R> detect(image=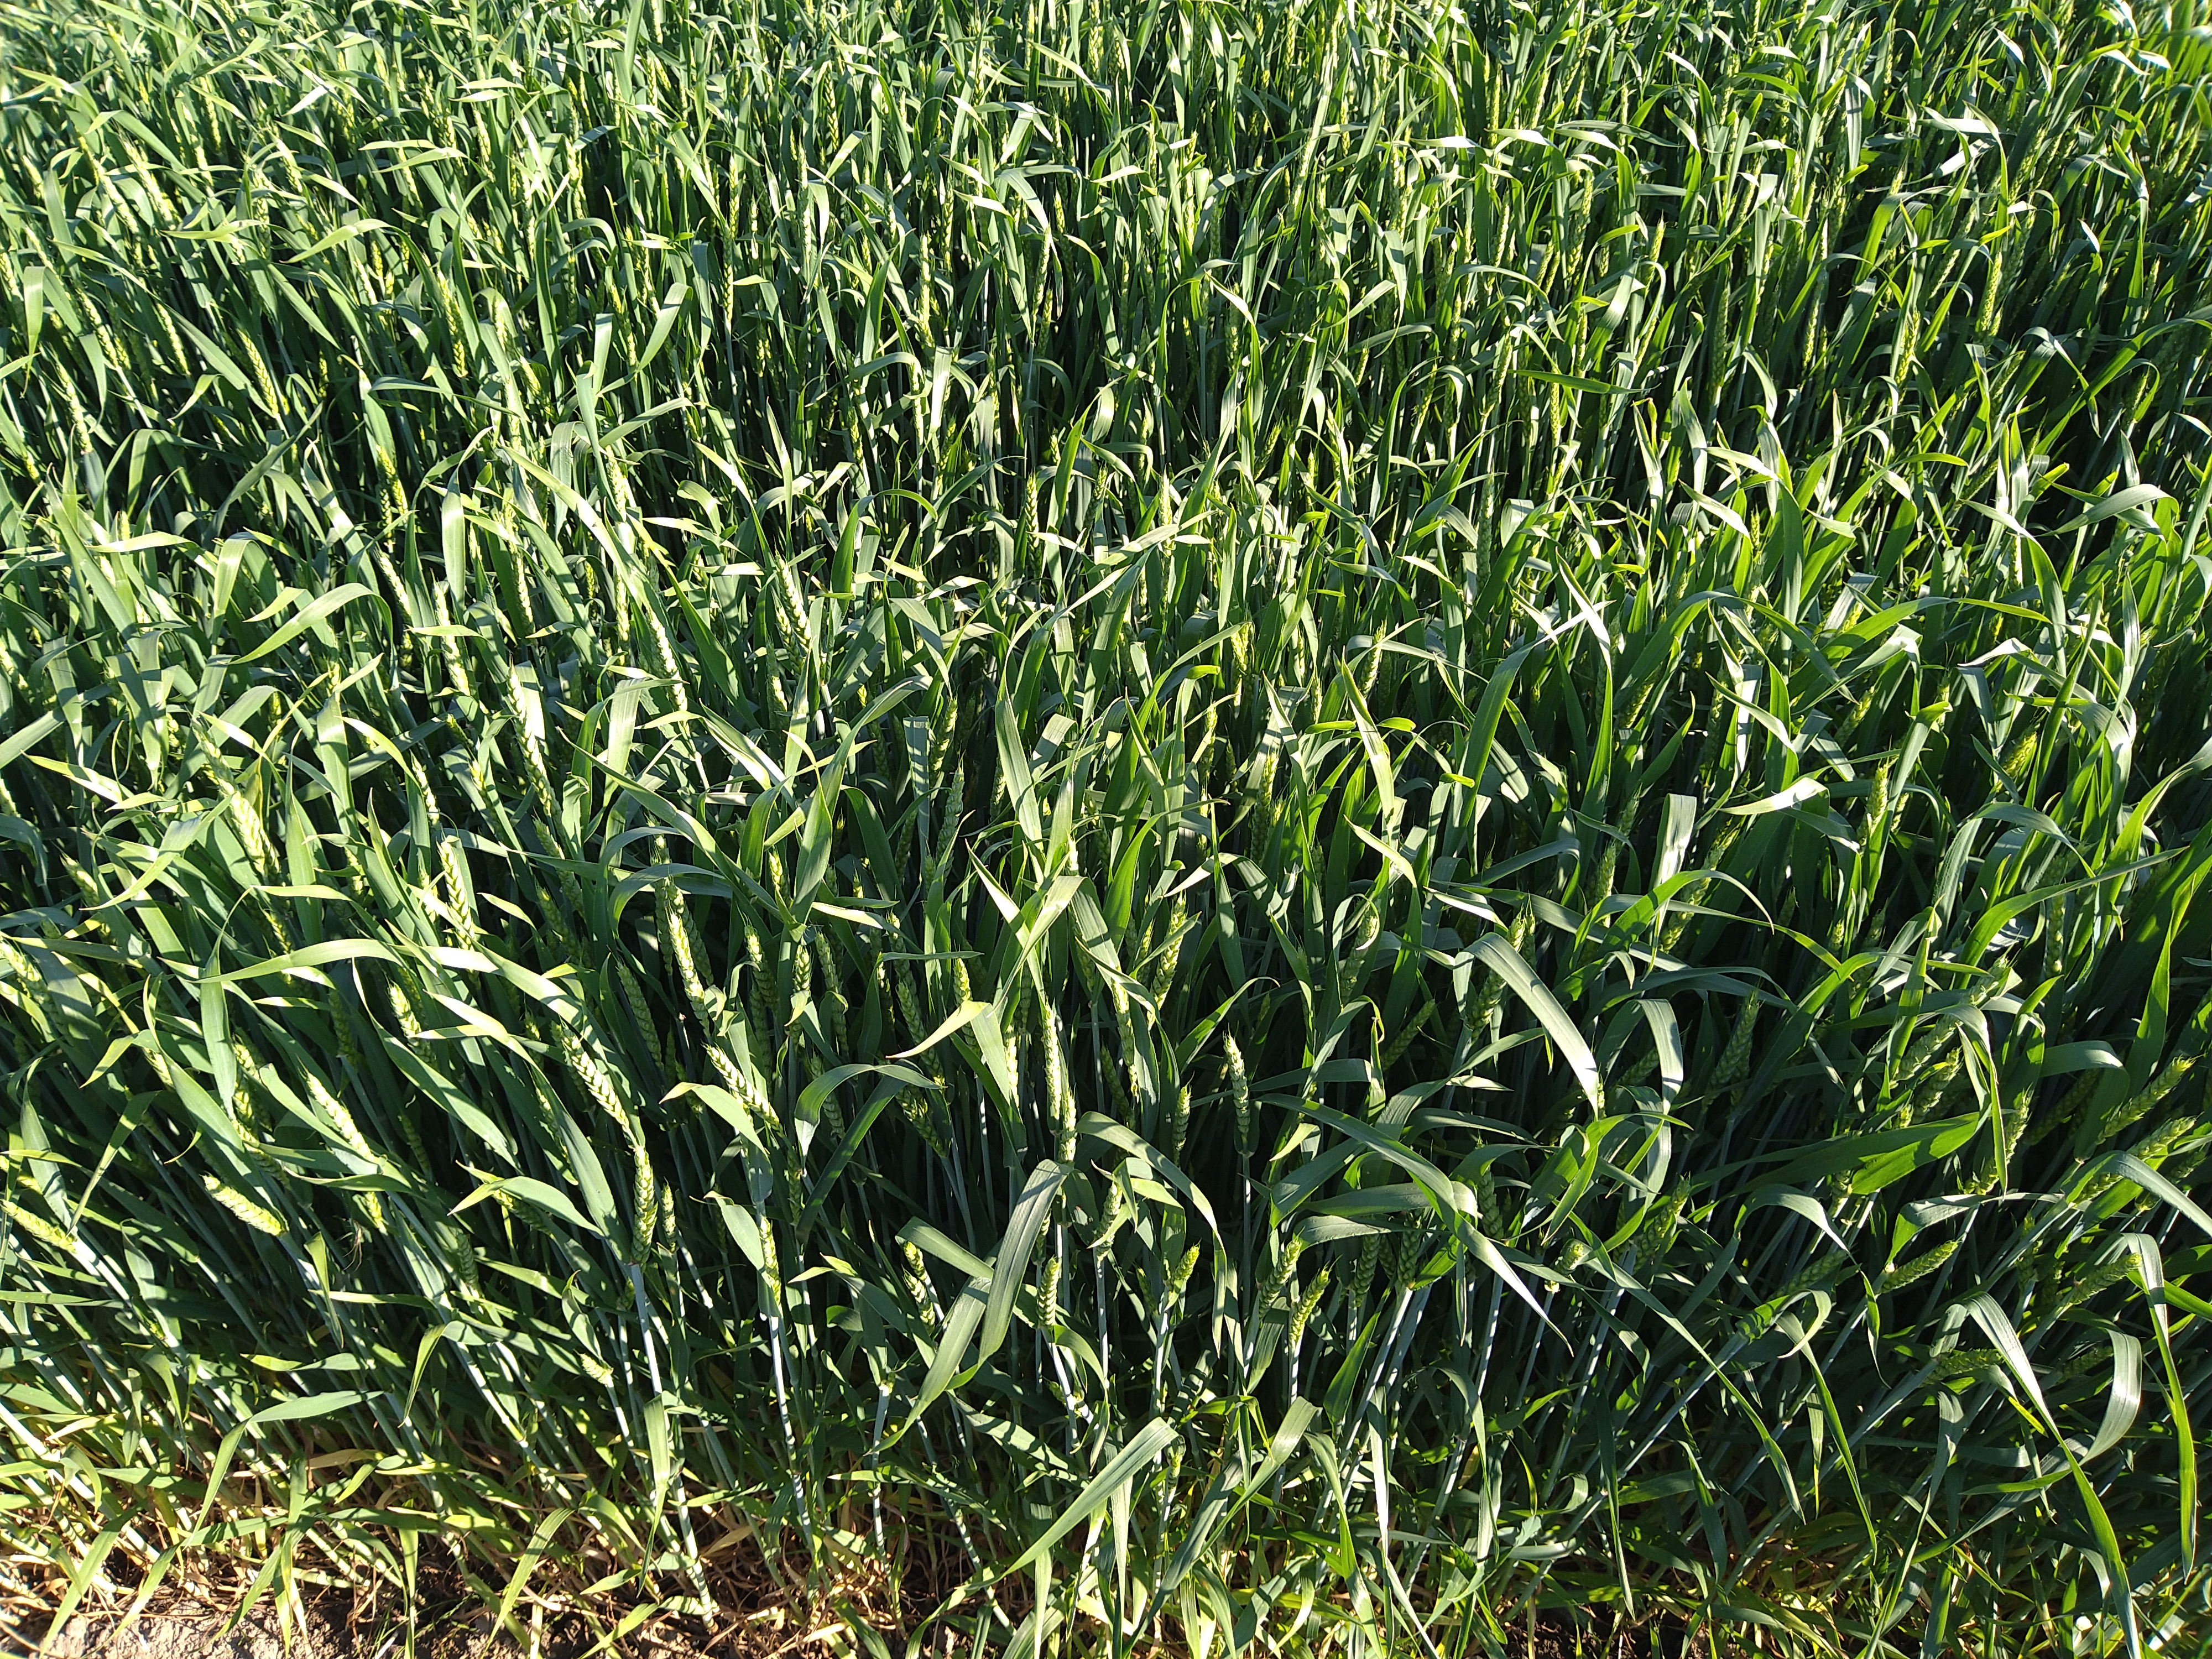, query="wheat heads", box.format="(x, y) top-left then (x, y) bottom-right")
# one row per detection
(376, 552), (414, 632)
(22, 154), (44, 194)
(1544, 251), (1562, 297)
(817, 147), (836, 211)
(654, 57), (680, 111)
(1110, 971), (1138, 1100)
(2008, 247), (2050, 323)
(918, 61), (925, 115)
(651, 616), (688, 728)
(1999, 718), (2043, 784)
(1530, 69), (1552, 131)
(1340, 900), (1377, 1009)
(40, 669), (70, 758)
(1750, 513), (1760, 549)
(958, 698), (975, 750)
(238, 887), (289, 980)
(630, 127), (639, 161)
(970, 59), (985, 123)
(221, 217), (269, 317)
(1491, 79), (1501, 147)
(851, 269), (858, 290)
(1147, 892), (1187, 1025)
(708, 599), (724, 640)
(1570, 168), (1580, 199)
(568, 158), (576, 185)
(1677, 274), (1708, 314)
(563, 1021), (632, 1122)
(1582, 864), (1603, 906)
(2049, 262), (2069, 297)
(2028, 130), (2063, 191)
(1882, 480), (1890, 501)
(1431, 686), (1477, 751)
(2049, 267), (2084, 330)
(1827, 164), (1835, 186)
(2023, 409), (2048, 463)
(931, 184), (940, 215)
(997, 88), (1007, 169)
(1289, 353), (1299, 409)
(1212, 481), (1223, 515)
(444, 107), (468, 194)
(1347, 624), (1384, 721)
(821, 13), (826, 37)
(1763, 109), (1782, 138)
(1380, 56), (1387, 91)
(518, 354), (561, 423)
(374, 50), (393, 107)
(1469, 912), (1527, 1042)
(1088, 795), (1113, 886)
(917, 315), (935, 363)
(1570, 254), (1582, 294)
(1112, 1109), (1138, 1174)
(2067, 596), (2096, 653)
(1927, 203), (1977, 300)
(2174, 131), (2198, 179)
(256, 183), (273, 266)
(1950, 301), (2005, 419)
(1093, 1181), (1122, 1257)
(219, 0), (247, 38)
(319, 347), (328, 394)
(1779, 59), (1792, 155)
(2195, 6), (2212, 28)
(397, 77), (412, 110)
(723, 222), (732, 318)
(1328, 607), (1343, 658)
(535, 1086), (562, 1138)
(1252, 423), (1283, 478)
(1149, 216), (1156, 256)
(1612, 1199), (1627, 1262)
(2066, 1251), (2142, 1304)
(138, 80), (147, 103)
(872, 585), (882, 606)
(2033, 1), (2073, 86)
(26, 224), (82, 318)
(1059, 1086), (1074, 1166)
(881, 104), (904, 175)
(1830, 687), (1874, 749)
(2163, 122), (2177, 142)
(902, 1269), (933, 1337)
(336, 51), (355, 125)
(1183, 158), (1194, 245)
(1731, 561), (1765, 655)
(1515, 821), (1527, 855)
(361, 345), (376, 378)
(1574, 312), (1587, 372)
(375, 480), (392, 540)
(0, 927), (71, 1038)
(673, 1058), (693, 1104)
(1669, 568), (1692, 616)
(926, 63), (931, 82)
(568, 667), (581, 747)
(1039, 797), (1054, 818)
(532, 813), (594, 924)
(753, 109), (761, 131)
(457, 1228), (477, 1283)
(1813, 1107), (1827, 1131)
(1137, 414), (1148, 485)
(1795, 620), (1826, 670)
(664, 1030), (674, 1086)
(1091, 458), (1097, 479)
(2075, 192), (2082, 237)
(132, 227), (141, 262)
(1680, 52), (1692, 125)
(504, 507), (520, 574)
(295, 564), (308, 591)
(1528, 685), (1541, 727)
(2063, 22), (2076, 41)
(150, 1050), (176, 1090)
(1939, 673), (1949, 726)
(1971, 193), (1998, 243)
(1719, 369), (1735, 402)
(1763, 21), (1771, 45)
(1036, 1204), (1051, 1245)
(619, 960), (661, 1065)
(647, 282), (672, 364)
(355, 256), (382, 318)
(563, 743), (575, 760)
(640, 247), (649, 290)
(191, 131), (216, 201)
(344, 845), (362, 902)
(1800, 300), (1818, 365)
(1598, 394), (1607, 425)
(762, 41), (772, 91)
(1595, 1074), (1606, 1118)
(1860, 760), (1890, 843)
(1888, 308), (1919, 400)
(347, 709), (396, 793)
(1278, 673), (1285, 687)
(1071, 583), (1084, 655)
(1482, 51), (1490, 99)
(1137, 566), (1148, 604)
(236, 328), (277, 411)
(1314, 189), (1326, 280)
(645, 313), (651, 339)
(2017, 1210), (2036, 1289)
(30, 764), (76, 815)
(1630, 1177), (1692, 1278)
(913, 565), (924, 653)
(511, 154), (517, 198)
(1977, 1096), (2032, 1194)
(1251, 83), (1269, 146)
(1331, 25), (1338, 55)
(281, 153), (298, 188)
(1213, 157), (1222, 180)
(805, 0), (815, 15)
(1685, 204), (1702, 270)
(1714, 771), (1750, 841)
(1138, 1267), (1157, 1317)
(1436, 252), (1455, 314)
(1448, 292), (1462, 364)
(637, 653), (649, 673)
(2138, 624), (2157, 646)
(104, 376), (120, 426)
(402, 65), (408, 90)
(482, 218), (493, 245)
(1051, 111), (1067, 201)
(1141, 252), (1156, 316)
(1844, 188), (1865, 225)
(1389, 143), (1397, 192)
(2101, 29), (2121, 85)
(1816, 196), (1829, 268)
(834, 44), (845, 76)
(1225, 739), (1238, 791)
(2075, 1112), (2198, 1198)
(2119, 374), (2147, 429)
(1770, 1247), (1847, 1300)
(1661, 838), (1731, 948)
(769, 852), (792, 907)
(1788, 148), (1804, 207)
(1911, 148), (1921, 195)
(1938, 365), (1958, 400)
(1506, 231), (1516, 269)
(519, 168), (534, 243)
(1591, 613), (1619, 717)
(820, 387), (837, 440)
(2042, 1252), (2065, 1312)
(1567, 212), (1577, 264)
(584, 153), (594, 204)
(503, 935), (520, 1015)
(24, 452), (47, 493)
(1501, 1191), (1511, 1217)
(1385, 342), (1393, 384)
(515, 552), (539, 654)
(795, 334), (807, 388)
(1616, 1045), (1662, 1089)
(1984, 613), (2003, 656)
(646, 56), (658, 125)
(1610, 1081), (1691, 1165)
(717, 1189), (723, 1245)
(550, 1021), (586, 1097)
(1312, 841), (1323, 886)
(522, 43), (532, 72)
(770, 589), (802, 680)
(1958, 458), (2000, 507)
(451, 295), (478, 382)
(857, 685), (871, 713)
(415, 850), (436, 937)
(2096, 1053), (2196, 1147)
(183, 103), (197, 138)
(1482, 334), (1511, 414)
(2183, 207), (2202, 249)
(419, 426), (430, 463)
(1020, 959), (1032, 1021)
(95, 17), (105, 31)
(816, 0), (826, 37)
(775, 547), (811, 653)
(893, 715), (905, 753)
(319, 869), (383, 982)
(222, 989), (235, 1020)
(1641, 175), (1649, 211)
(325, 988), (362, 1070)
(670, 135), (682, 182)
(896, 90), (907, 126)
(741, 69), (748, 101)
(1340, 103), (1350, 174)
(0, 252), (30, 335)
(2008, 121), (2050, 202)
(4, 1200), (78, 1250)
(0, 774), (21, 818)
(1835, 600), (1863, 642)
(850, 405), (862, 463)
(1731, 54), (1739, 76)
(1183, 314), (1201, 377)
(1540, 98), (1554, 128)
(34, 910), (105, 1005)
(647, 0), (663, 41)
(333, 99), (356, 135)
(565, 75), (584, 120)
(1385, 0), (1396, 46)
(977, 204), (989, 250)
(1379, 295), (1393, 334)
(1182, 371), (1194, 410)
(825, 218), (836, 251)
(750, 194), (755, 226)
(197, 1175), (284, 1233)
(1620, 18), (1630, 41)
(1559, 1242), (1582, 1278)
(487, 1186), (548, 1229)
(1125, 909), (1137, 948)
(611, 286), (625, 337)
(0, 638), (37, 709)
(1211, 201), (1223, 293)
(1890, 169), (1905, 196)
(927, 284), (944, 327)
(121, 1084), (169, 1141)
(376, 443), (409, 525)
(2040, 851), (2063, 887)
(1443, 385), (1454, 443)
(1226, 322), (1237, 370)
(1129, 478), (1140, 525)
(1565, 19), (1591, 94)
(568, 250), (576, 322)
(1709, 284), (1731, 391)
(832, 816), (848, 859)
(2009, 88), (2027, 143)
(1477, 269), (1484, 308)
(806, 513), (818, 560)
(76, 126), (99, 183)
(1884, 42), (1894, 98)
(1978, 250), (2002, 331)
(893, 1083), (939, 1155)
(2143, 1149), (2206, 1210)
(2036, 121), (2082, 205)
(1498, 89), (1508, 121)
(642, 286), (647, 319)
(1826, 1168), (1851, 1209)
(92, 160), (149, 252)
(409, 750), (440, 827)
(389, 983), (443, 1072)
(1992, 352), (2022, 395)
(397, 144), (425, 216)
(346, 916), (383, 981)
(1004, 1024), (1016, 1105)
(1887, 447), (1894, 465)
(786, 325), (797, 369)
(1296, 303), (1306, 337)
(844, 207), (852, 242)
(399, 1107), (433, 1183)
(2138, 259), (2160, 326)
(240, 558), (260, 605)
(1613, 782), (1642, 855)
(1327, 0), (1343, 46)
(1086, 0), (1100, 75)
(469, 524), (481, 562)
(1733, 1036), (1751, 1103)
(572, 189), (585, 238)
(708, 1045), (786, 1135)
(1006, 342), (1012, 363)
(571, 109), (579, 142)
(117, 508), (130, 540)
(1402, 125), (1411, 154)
(1349, 83), (1353, 104)
(989, 746), (1008, 826)
(584, 225), (606, 272)
(924, 852), (937, 894)
(1518, 361), (1530, 433)
(197, 714), (262, 869)
(798, 143), (811, 254)
(1783, 230), (1802, 288)
(1064, 838), (1079, 879)
(896, 982), (946, 1094)
(1486, 203), (1510, 288)
(787, 1142), (804, 1220)
(1375, 0), (1385, 34)
(910, 363), (923, 439)
(679, 81), (688, 119)
(1309, 676), (1322, 721)
(1646, 102), (1655, 133)
(105, 296), (130, 369)
(1010, 192), (1022, 227)
(475, 110), (491, 157)
(1534, 238), (1554, 287)
(398, 195), (411, 263)
(1296, 626), (1304, 675)
(397, 629), (414, 675)
(747, 979), (775, 1092)
(2157, 337), (2185, 388)
(1000, 596), (1007, 622)
(1834, 133), (1848, 199)
(2050, 883), (2066, 979)
(595, 275), (605, 308)
(1209, 333), (1217, 390)
(861, 163), (870, 221)
(1305, 449), (1314, 515)
(1550, 366), (1560, 438)
(1433, 189), (1442, 269)
(1228, 286), (1239, 331)
(201, 761), (290, 913)
(1497, 292), (1511, 330)
(1461, 274), (1470, 297)
(952, 955), (982, 1055)
(614, 69), (621, 134)
(815, 929), (848, 1043)
(1387, 192), (1407, 281)
(231, 1080), (293, 1190)
(1705, 62), (1715, 86)
(2111, 515), (2125, 550)
(679, 358), (690, 394)
(809, 1053), (849, 1136)
(667, 911), (711, 1031)
(1054, 192), (1077, 283)
(685, 410), (703, 460)
(1257, 992), (1270, 1022)
(1917, 1348), (2007, 1386)
(1475, 1142), (1503, 1238)
(1230, 625), (1249, 719)
(898, 1237), (924, 1275)
(1042, 1257), (1060, 1330)
(1415, 0), (1438, 66)
(1920, 125), (1936, 159)
(1133, 142), (1146, 184)
(710, 164), (719, 238)
(1399, 689), (1417, 723)
(1377, 650), (1393, 711)
(1343, 345), (1369, 413)
(1740, 232), (1752, 277)
(418, 69), (435, 115)
(192, 1126), (224, 1178)
(1896, 434), (1905, 456)
(1577, 416), (1592, 444)
(566, 138), (586, 201)
(1164, 1241), (1198, 1307)
(1642, 145), (1655, 181)
(301, 1064), (371, 1163)
(1765, 1010), (1837, 1095)
(1596, 846), (1616, 925)
(1510, 101), (1520, 129)
(1589, 22), (1598, 46)
(2006, 537), (2022, 639)
(2052, 1346), (2118, 1385)
(1045, 30), (1066, 124)
(825, 72), (841, 151)
(393, 966), (429, 1030)
(323, 648), (340, 698)
(1891, 793), (1909, 833)
(794, 946), (810, 1048)
(114, 123), (176, 230)
(546, 792), (567, 835)
(2148, 169), (2164, 225)
(1370, 81), (1381, 113)
(735, 61), (740, 94)
(1511, 587), (1520, 615)
(1197, 788), (1208, 864)
(467, 213), (479, 240)
(646, 810), (674, 865)
(1829, 198), (1844, 256)
(1226, 159), (1242, 212)
(834, 704), (843, 720)
(715, 53), (722, 74)
(1813, 325), (1829, 401)
(1017, 355), (1022, 372)
(1660, 127), (1666, 161)
(368, 230), (383, 270)
(1135, 918), (1152, 983)
(1121, 255), (1129, 325)
(1393, 336), (1407, 381)
(578, 184), (590, 216)
(369, 639), (393, 702)
(1753, 623), (1774, 670)
(1805, 918), (1846, 990)
(928, 696), (958, 778)
(893, 0), (915, 64)
(847, 350), (862, 412)
(640, 539), (649, 565)
(1197, 703), (1217, 783)
(1200, 273), (1208, 325)
(1194, 60), (1214, 117)
(1317, 11), (1324, 48)
(1685, 631), (1706, 696)
(401, 359), (430, 428)
(1351, 1230), (1381, 1305)
(2103, 561), (2122, 610)
(1080, 464), (1109, 545)
(493, 294), (504, 346)
(202, 75), (220, 145)
(1723, 115), (1740, 198)
(1889, 1105), (1908, 1133)
(1102, 1039), (1130, 1120)
(1525, 543), (1539, 577)
(760, 323), (779, 388)
(1184, 132), (1199, 163)
(790, 420), (796, 447)
(2051, 841), (2094, 884)
(624, 319), (636, 381)
(1145, 227), (1149, 245)
(1670, 463), (1680, 489)
(1549, 1043), (1594, 1144)
(1296, 947), (1310, 1026)
(1763, 292), (1777, 350)
(1745, 0), (1760, 40)
(852, 869), (865, 911)
(1705, 997), (1757, 1108)
(667, 878), (714, 982)
(469, 754), (504, 840)
(2136, 645), (2172, 725)
(1224, 1034), (1252, 1127)
(1421, 122), (1429, 143)
(627, 1148), (655, 1305)
(290, 443), (301, 477)
(883, 169), (899, 264)
(1757, 241), (1773, 302)
(1212, 521), (1223, 588)
(1611, 200), (1619, 249)
(49, 312), (94, 380)
(1116, 622), (1138, 694)
(294, 213), (317, 244)
(1910, 1044), (1962, 1127)
(1367, 401), (1374, 427)
(1399, 1205), (1428, 1285)
(1447, 87), (1455, 163)
(1106, 262), (1114, 279)
(1251, 1239), (1301, 1318)
(1088, 36), (1101, 84)
(100, 554), (115, 590)
(532, 876), (581, 956)
(757, 1216), (782, 1305)
(1384, 83), (1397, 127)
(525, 1011), (547, 1074)
(765, 678), (776, 731)
(130, 329), (157, 402)
(2023, 1058), (2109, 1143)
(1174, 1084), (1191, 1147)
(729, 156), (739, 239)
(1101, 674), (1115, 708)
(76, 283), (115, 363)
(1075, 815), (1087, 874)
(505, 664), (550, 810)
(742, 922), (778, 1014)
(1037, 288), (1052, 360)
(1326, 406), (1339, 479)
(1232, 71), (1240, 121)
(824, 861), (836, 896)
(615, 564), (630, 654)
(267, 905), (312, 1010)
(1525, 910), (1535, 975)
(1573, 65), (1586, 114)
(1734, 162), (1759, 231)
(1337, 21), (1349, 74)
(1655, 606), (1668, 630)
(364, 191), (376, 219)
(1251, 65), (1270, 129)
(1401, 185), (1414, 200)
(1265, 551), (1273, 601)
(136, 598), (164, 653)
(607, 460), (626, 512)
(746, 0), (752, 13)
(2161, 127), (2195, 173)
(2101, 32), (2135, 106)
(1157, 465), (1170, 552)
(1203, 97), (1218, 159)
(153, 289), (192, 370)
(1791, 0), (1809, 46)
(503, 377), (520, 455)
(45, 51), (58, 77)
(1026, 475), (1041, 578)
(1803, 180), (1816, 224)
(433, 577), (469, 697)
(1724, 197), (1736, 220)
(886, 909), (920, 1018)
(1716, 53), (1732, 127)
(106, 23), (121, 46)
(1285, 170), (1290, 207)
(1491, 151), (1504, 189)
(1378, 997), (1435, 1074)
(1149, 129), (1157, 185)
(1020, 204), (1033, 279)
(1482, 834), (1496, 870)
(2066, 321), (2100, 402)
(1024, 2), (1035, 71)
(1031, 225), (1052, 313)
(1618, 85), (1628, 153)
(1138, 328), (1148, 359)
(578, 1354), (614, 1388)
(156, 180), (182, 223)
(2119, 322), (2181, 426)
(1452, 564), (1462, 589)
(625, 225), (640, 267)
(1264, 791), (1290, 855)
(104, 664), (122, 703)
(1017, 385), (1023, 407)
(767, 640), (790, 727)
(58, 360), (94, 453)
(1993, 210), (2034, 305)
(1993, 87), (2006, 122)
(582, 557), (596, 619)
(383, 271), (395, 311)
(136, 137), (158, 189)
(764, 111), (770, 139)
(751, 146), (773, 227)
(383, 710), (391, 732)
(223, 327), (255, 384)
(1243, 150), (1263, 209)
(738, 819), (746, 845)
(1810, 279), (1823, 305)
(1641, 215), (1666, 292)
(1072, 910), (1095, 986)
(1834, 22), (1853, 68)
(438, 271), (465, 369)
(1147, 331), (1156, 374)
(365, 1191), (385, 1229)
(582, 96), (593, 132)
(1600, 241), (1609, 279)
(437, 102), (443, 129)
(1463, 222), (1471, 264)
(1636, 316), (1655, 364)
(1159, 538), (1172, 608)
(98, 928), (132, 988)
(492, 224), (507, 276)
(755, 328), (764, 369)
(648, 854), (674, 977)
(2146, 104), (2163, 138)
(934, 218), (950, 269)
(1285, 1264), (1330, 1348)
(1041, 1002), (1059, 1120)
(1856, 383), (1876, 420)
(1875, 1237), (1962, 1295)
(1190, 0), (1204, 77)
(936, 414), (956, 490)
(1329, 167), (1343, 203)
(137, 963), (176, 1016)
(1397, 164), (1405, 191)
(1617, 663), (1661, 730)
(841, 1), (847, 43)
(1895, 953), (2008, 1083)
(13, 1031), (40, 1104)
(870, 913), (889, 986)
(1250, 735), (1284, 862)
(1703, 668), (1728, 764)
(578, 71), (586, 97)
(1822, 80), (1844, 136)
(303, 19), (310, 37)
(1379, 1228), (1396, 1279)
(1827, 103), (1848, 148)
(920, 234), (930, 318)
(1899, 122), (1911, 164)
(603, 637), (614, 674)
(649, 563), (663, 671)
(1228, 627), (1255, 708)
(895, 805), (919, 881)
(870, 718), (890, 784)
(1063, 82), (1072, 131)
(1772, 892), (1798, 950)
(662, 1182), (676, 1247)
(1768, 37), (1776, 63)
(319, 214), (349, 281)
(2128, 860), (2172, 919)
(1990, 108), (2008, 176)
(1565, 179), (1591, 280)
(1476, 471), (1494, 594)
(932, 764), (965, 882)
(63, 852), (103, 910)
(1918, 541), (1932, 568)
(1554, 461), (1563, 487)
(1051, 434), (1062, 465)
(991, 530), (999, 579)
(1944, 4), (1970, 67)
(106, 689), (138, 769)
(1287, 139), (1311, 214)
(941, 179), (955, 249)
(1107, 41), (1124, 80)
(477, 133), (491, 169)
(1104, 347), (1119, 406)
(680, 527), (702, 580)
(1980, 159), (2006, 211)
(702, 156), (713, 197)
(1885, 249), (1895, 301)
(1469, 628), (1483, 685)
(159, 1018), (191, 1038)
(164, 708), (187, 748)
(1850, 910), (1885, 998)
(445, 709), (470, 751)
(226, 1024), (271, 1090)
(790, 128), (797, 160)
(1921, 55), (1940, 95)
(148, 193), (165, 227)
(1068, 142), (1079, 202)
(988, 350), (999, 436)
(860, 238), (870, 275)
(1256, 4), (1264, 35)
(1416, 362), (1437, 421)
(437, 839), (481, 986)
(537, 434), (547, 522)
(1692, 11), (1706, 48)
(945, 595), (956, 632)
(1283, 5), (1294, 92)
(267, 682), (284, 761)
(919, 135), (941, 198)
